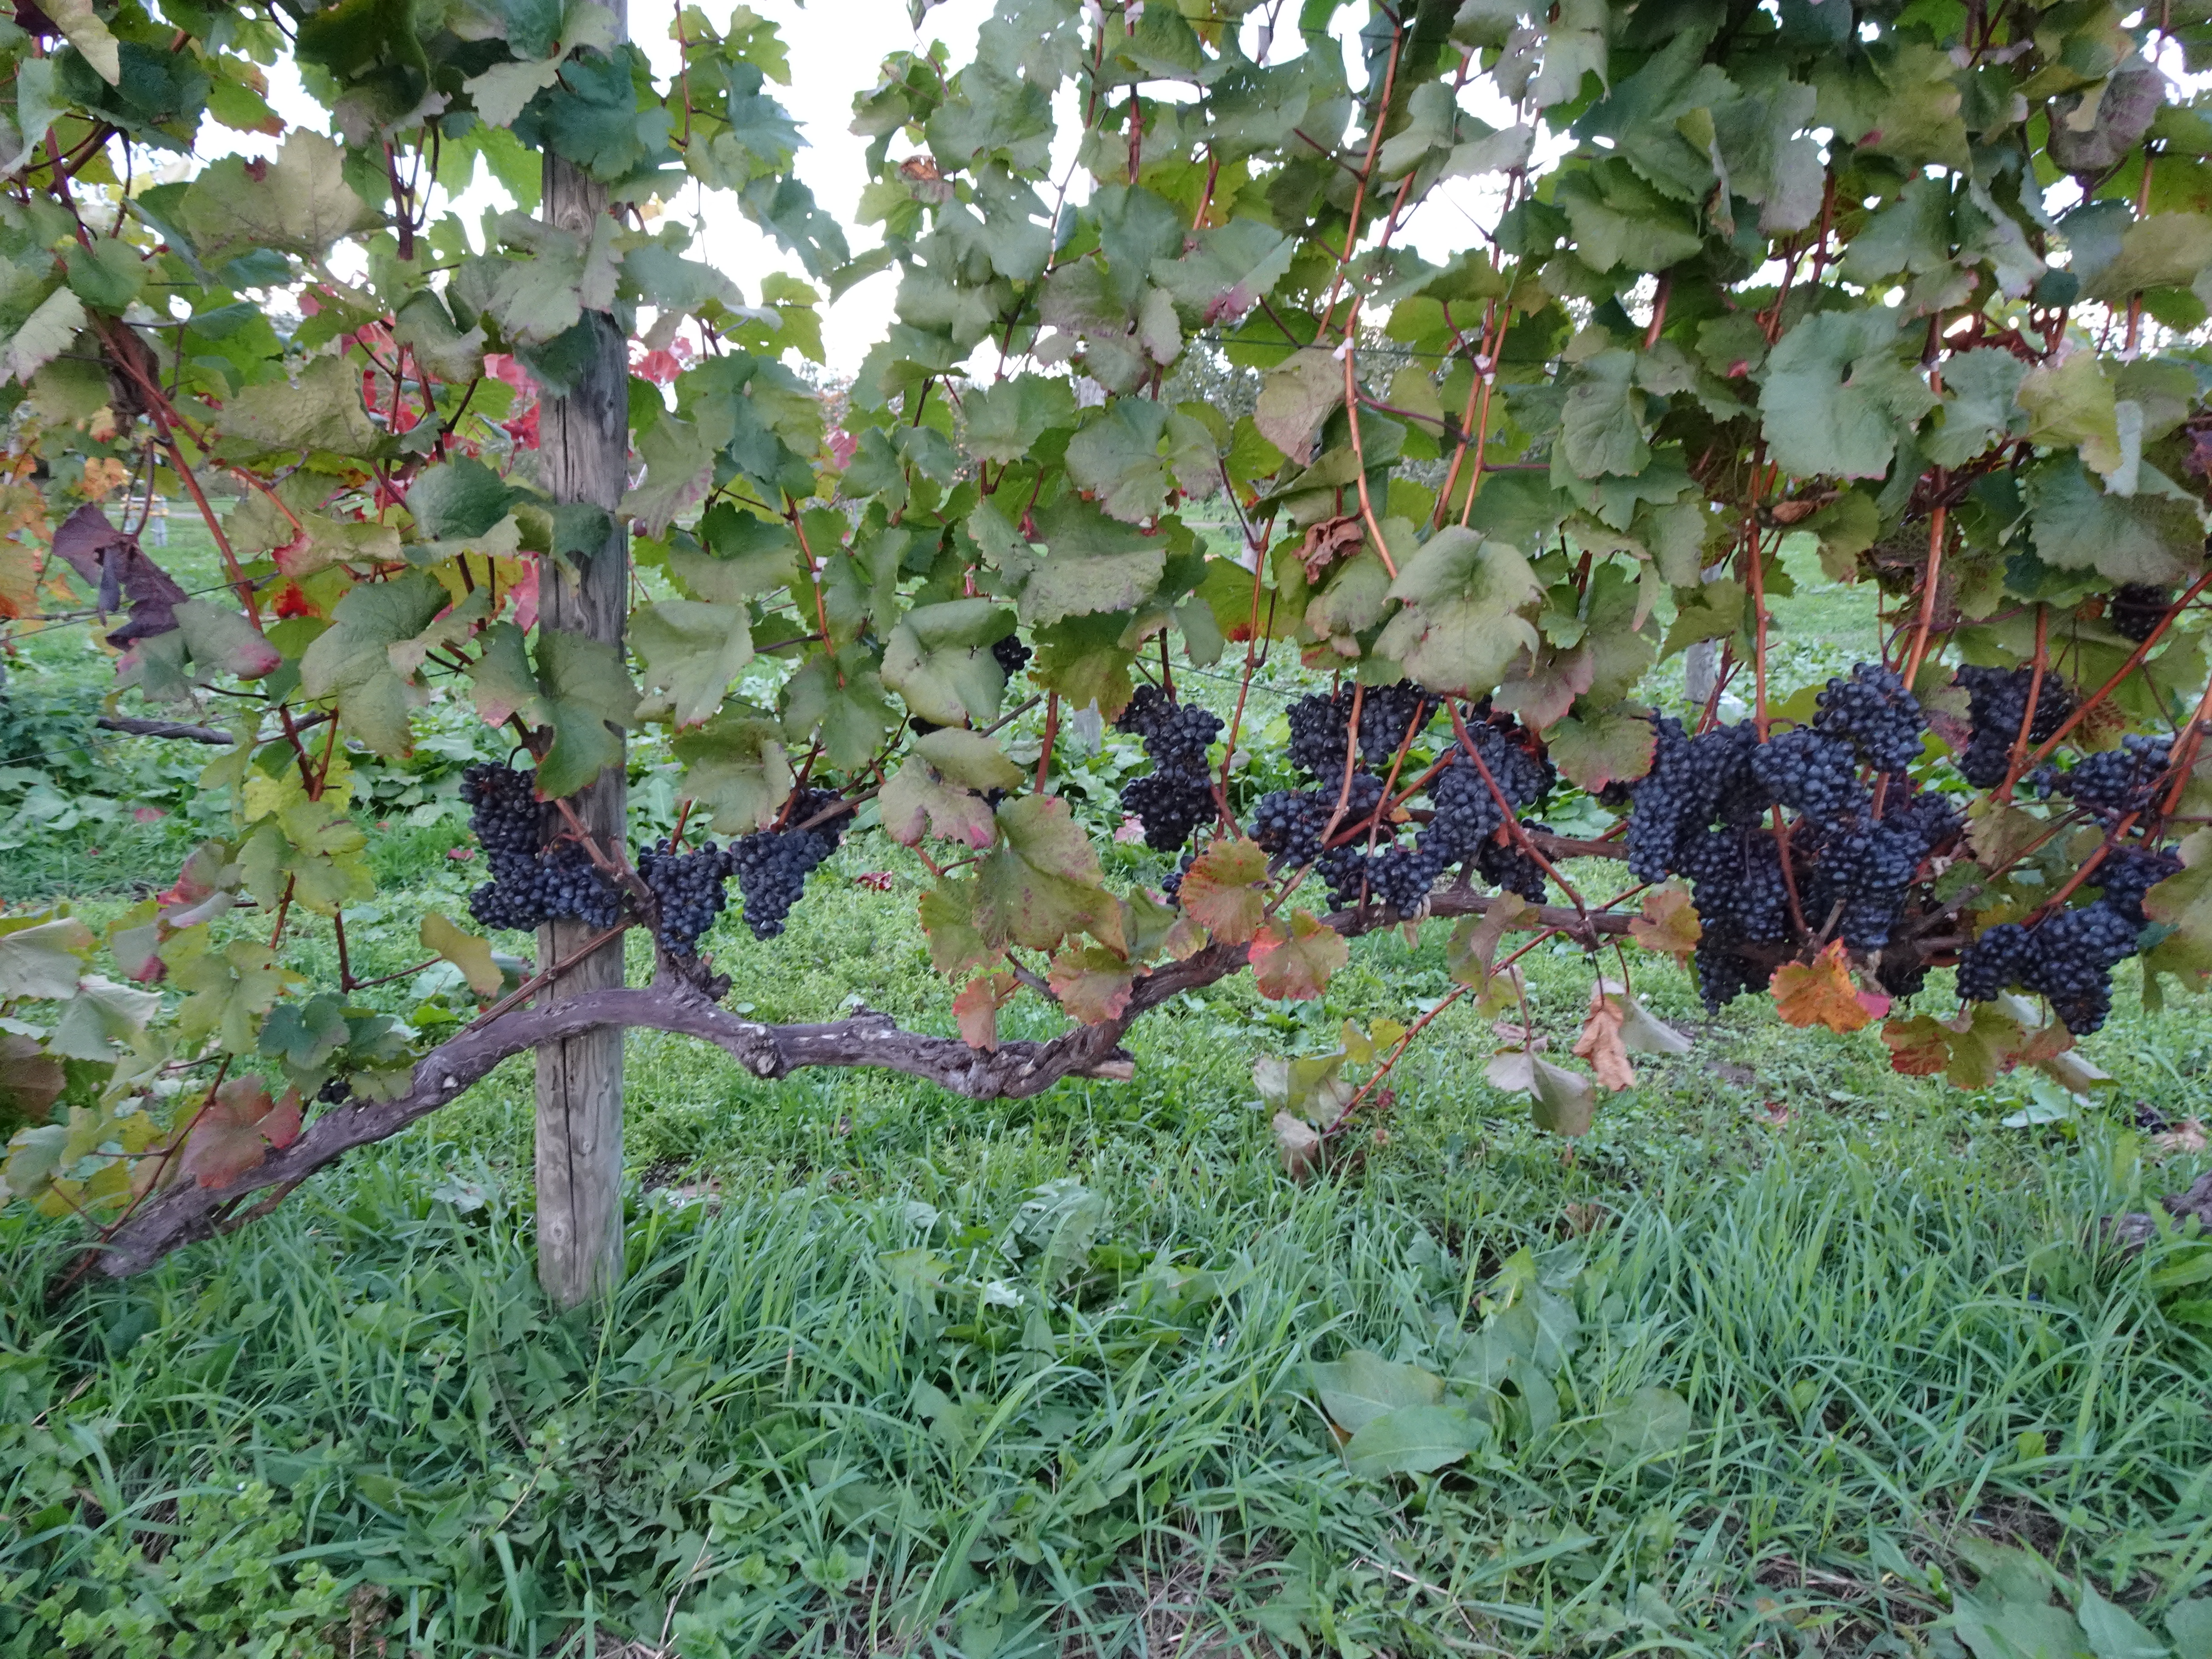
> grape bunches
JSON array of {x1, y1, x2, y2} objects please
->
[
  {"x1": 976, "y1": 626, "x2": 1034, "y2": 682},
  {"x1": 1142, "y1": 705, "x2": 1226, "y2": 800},
  {"x1": 2101, "y1": 571, "x2": 2186, "y2": 657},
  {"x1": 455, "y1": 759, "x2": 541, "y2": 880},
  {"x1": 1627, "y1": 716, "x2": 1774, "y2": 886},
  {"x1": 1117, "y1": 764, "x2": 1224, "y2": 856},
  {"x1": 1952, "y1": 896, "x2": 2045, "y2": 1007},
  {"x1": 465, "y1": 857, "x2": 561, "y2": 934},
  {"x1": 1416, "y1": 718, "x2": 1553, "y2": 877},
  {"x1": 1868, "y1": 895, "x2": 1969, "y2": 1004},
  {"x1": 1323, "y1": 842, "x2": 1388, "y2": 917},
  {"x1": 1946, "y1": 661, "x2": 2081, "y2": 789},
  {"x1": 2123, "y1": 1100, "x2": 2176, "y2": 1137},
  {"x1": 2028, "y1": 735, "x2": 2183, "y2": 834},
  {"x1": 1244, "y1": 787, "x2": 1329, "y2": 869},
  {"x1": 726, "y1": 827, "x2": 828, "y2": 943},
  {"x1": 1281, "y1": 689, "x2": 1381, "y2": 819},
  {"x1": 1792, "y1": 808, "x2": 1932, "y2": 963},
  {"x1": 1885, "y1": 782, "x2": 1967, "y2": 873},
  {"x1": 1688, "y1": 826, "x2": 1790, "y2": 1018},
  {"x1": 1363, "y1": 840, "x2": 1450, "y2": 923},
  {"x1": 532, "y1": 850, "x2": 626, "y2": 928},
  {"x1": 1596, "y1": 715, "x2": 1686, "y2": 810},
  {"x1": 314, "y1": 1067, "x2": 358, "y2": 1109},
  {"x1": 635, "y1": 836, "x2": 741, "y2": 959},
  {"x1": 1467, "y1": 818, "x2": 1575, "y2": 912},
  {"x1": 1748, "y1": 724, "x2": 1882, "y2": 857},
  {"x1": 1105, "y1": 680, "x2": 1173, "y2": 739},
  {"x1": 2024, "y1": 898, "x2": 2142, "y2": 1038},
  {"x1": 1808, "y1": 659, "x2": 1929, "y2": 780},
  {"x1": 773, "y1": 774, "x2": 862, "y2": 868},
  {"x1": 2072, "y1": 841, "x2": 2197, "y2": 912},
  {"x1": 1162, "y1": 845, "x2": 1232, "y2": 907},
  {"x1": 1429, "y1": 678, "x2": 1561, "y2": 807},
  {"x1": 1340, "y1": 673, "x2": 1458, "y2": 772}
]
